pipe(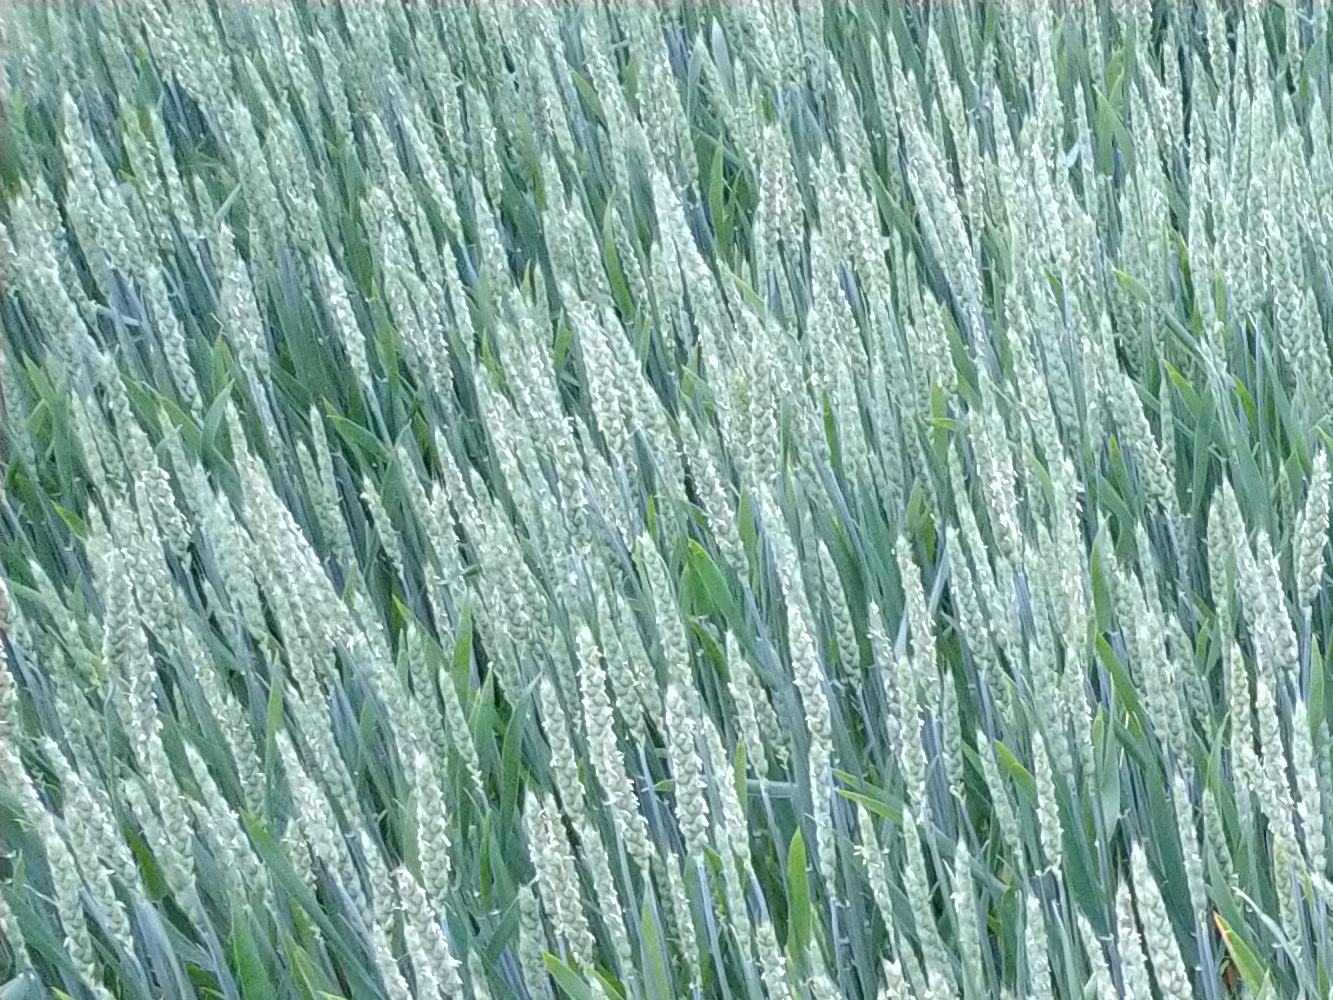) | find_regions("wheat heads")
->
[152,736,195,865]
[705,719,753,873]
[57,697,89,776]
[986,151,1002,227]
[545,791,567,858]
[885,968,925,1000]
[922,292,957,391]
[617,598,665,731]
[932,99,943,158]
[274,737,307,811]
[1075,81,1096,210]
[779,340,809,414]
[395,62,432,121]
[902,410,939,516]
[529,17,558,43]
[1229,18,1247,110]
[813,256,868,374]
[130,625,165,757]
[472,593,501,672]
[1076,916,1129,1000]
[407,628,448,775]
[412,0,449,67]
[0,727,56,830]
[287,129,314,224]
[419,208,440,277]
[418,283,454,399]
[1068,296,1083,358]
[0,355,38,477]
[287,815,318,890]
[640,535,693,684]
[924,48,934,85]
[1189,162,1207,231]
[852,102,874,180]
[8,192,33,255]
[209,59,248,155]
[970,121,978,178]
[4,95,46,178]
[112,514,181,644]
[128,194,163,265]
[368,876,399,942]
[1309,98,1333,195]
[261,386,281,463]
[980,44,996,107]
[539,214,569,304]
[1279,464,1294,542]
[17,201,55,265]
[104,369,142,475]
[51,650,76,702]
[86,398,128,489]
[430,487,465,604]
[60,143,130,269]
[896,538,941,708]
[552,50,580,114]
[1273,836,1303,950]
[1260,81,1274,161]
[614,363,638,430]
[1126,170,1138,230]
[1115,884,1162,1000]
[1003,292,1035,365]
[398,448,435,539]
[1314,0,1327,48]
[1073,209,1105,318]
[903,871,960,994]
[733,61,753,154]
[172,0,205,47]
[717,0,745,54]
[596,517,623,583]
[1194,54,1218,141]
[1026,897,1057,1000]
[175,684,186,728]
[243,0,288,95]
[609,121,630,193]
[264,500,336,665]
[361,834,396,932]
[347,27,397,134]
[44,739,82,801]
[61,93,93,179]
[992,26,1016,98]
[613,0,629,37]
[1104,0,1136,39]
[135,482,162,555]
[652,61,675,151]
[806,309,822,411]
[736,0,758,53]
[833,75,858,164]
[360,0,395,66]
[944,530,982,631]
[1187,112,1203,180]
[1126,289,1142,328]
[220,495,269,642]
[700,48,741,148]
[320,257,370,382]
[971,306,988,367]
[1208,5,1228,88]
[899,939,933,1000]
[1305,291,1333,422]
[30,43,60,88]
[316,38,352,140]
[441,671,482,779]
[471,176,509,309]
[297,442,331,543]
[256,218,276,267]
[858,806,894,939]
[1239,744,1285,836]
[432,0,462,62]
[67,24,106,115]
[639,68,663,158]
[50,37,88,118]
[584,828,634,975]
[0,73,14,98]
[1148,245,1165,349]
[520,317,566,408]
[770,323,809,406]
[285,682,315,734]
[977,731,1023,873]
[1136,525,1162,615]
[990,414,1023,571]
[1029,646,1072,776]
[1012,0,1030,76]
[551,629,584,730]
[1221,483,1259,618]
[718,830,752,955]
[115,17,145,54]
[129,423,154,475]
[269,585,326,714]
[410,222,427,275]
[668,854,701,982]
[405,121,461,234]
[954,840,982,986]
[385,265,429,378]
[63,810,133,948]
[838,365,867,483]
[184,631,230,717]
[269,132,301,214]
[232,260,267,369]
[527,494,560,590]
[143,535,177,624]
[386,0,412,43]
[1161,383,1176,475]
[1039,25,1065,125]
[596,597,647,738]
[68,281,100,326]
[1246,97,1263,174]
[1027,183,1049,244]
[353,628,382,697]
[667,436,683,489]
[218,229,246,356]
[106,550,128,694]
[1161,663,1191,768]
[226,697,268,821]
[122,122,172,239]
[581,422,623,533]
[301,723,361,824]
[957,1,975,77]
[61,0,80,20]
[1043,273,1065,343]
[476,93,501,203]
[1138,850,1200,1000]
[242,539,275,595]
[894,228,903,322]
[1248,33,1254,79]
[1064,458,1080,540]
[585,313,629,451]
[146,270,204,418]
[1207,496,1229,630]
[339,0,366,50]
[1266,218,1302,369]
[577,627,613,784]
[641,20,659,63]
[129,781,205,926]
[667,77,700,188]
[8,601,34,659]
[525,791,553,919]
[1117,379,1173,507]
[718,261,745,323]
[663,185,719,311]
[1283,91,1298,142]
[1020,418,1045,518]
[96,0,126,39]
[786,609,834,749]
[111,197,145,275]
[772,248,799,339]
[1167,619,1211,729]
[160,412,200,516]
[517,883,545,987]
[753,224,770,299]
[822,145,849,252]
[157,44,173,80]
[499,633,519,699]
[1283,0,1305,87]
[1065,649,1096,783]
[1133,0,1146,56]
[760,130,778,235]
[1263,165,1277,225]
[544,859,584,966]
[519,939,567,1000]
[397,875,466,1000]
[871,603,896,712]
[666,689,708,852]
[819,542,861,684]
[479,567,505,624]
[533,264,550,335]
[249,512,307,649]
[968,413,996,503]
[1086,1,1104,89]
[37,177,76,286]
[302,788,337,861]
[372,930,436,1000]
[1210,94,1225,162]
[98,37,134,99]
[1001,210,1028,285]
[144,469,190,551]
[1256,681,1293,802]
[388,706,414,782]
[757,924,794,1000]
[1052,177,1076,257]
[423,566,453,652]
[801,0,827,89]
[324,28,367,105]
[773,67,791,119]
[813,282,838,382]
[1152,174,1170,228]
[527,65,550,153]
[1163,42,1181,136]
[320,723,362,809]
[611,211,649,311]
[362,479,403,570]
[781,138,804,226]
[897,660,926,807]
[27,263,76,357]
[923,138,951,189]
[470,468,494,539]
[1035,86,1054,159]
[1149,614,1167,668]
[185,747,277,908]
[1143,69,1170,157]
[88,616,106,661]
[603,313,675,444]
[995,561,1022,671]
[867,310,881,372]
[1295,454,1330,604]
[479,0,503,70]
[933,215,961,302]
[847,166,890,300]
[122,134,162,230]
[1082,339,1101,451]
[475,376,529,527]
[108,684,138,757]
[495,0,532,83]
[1170,0,1190,41]
[70,203,112,294]
[927,25,956,119]
[1128,569,1151,642]
[281,214,310,294]
[69,395,105,488]
[726,633,762,767]
[1031,733,1063,864]
[29,562,103,681]
[1027,368,1064,477]
[942,673,964,794]
[236,109,285,233]
[759,489,812,629]
[434,430,482,540]
[699,305,739,374]
[1025,269,1044,308]
[1184,214,1218,356]
[119,0,143,27]
[1173,778,1207,921]
[532,41,573,151]
[725,367,754,472]
[33,0,49,37]
[335,876,375,936]
[990,107,1021,220]
[193,175,220,274]
[1254,34,1271,83]
[217,114,262,217]
[652,178,669,240]
[499,549,531,640]
[274,0,316,112]
[906,250,926,340]
[790,400,817,466]
[1049,481,1079,576]
[1246,177,1266,311]
[652,243,670,344]
[0,667,21,748]
[539,154,569,252]
[444,245,475,352]
[679,417,750,586]
[1033,141,1066,261]
[1130,82,1153,153]
[14,265,49,337]
[975,356,992,414]
[807,944,843,1000]
[1025,554,1058,674]
[314,258,344,344]
[87,500,116,555]
[405,935,460,1000]
[335,516,356,571]
[4,22,39,99]
[1293,702,1326,871]
[357,201,380,274]
[67,780,144,893]
[1141,631,1169,747]
[879,301,903,392]
[191,803,243,888]
[225,402,258,513]
[578,30,610,98]
[1033,59,1040,112]
[410,35,444,105]
[354,591,387,659]
[0,884,34,974]
[46,839,99,984]
[152,112,196,232]
[500,327,529,383]
[1245,0,1265,41]
[545,402,594,549]
[1259,539,1300,676]
[869,37,896,141]
[902,807,929,896]
[892,65,917,160]
[614,445,639,504]
[654,480,680,553]
[661,238,693,338]
[1117,195,1139,275]
[811,745,838,899]
[446,0,485,83]
[1290,136,1308,217]
[550,528,586,627]
[0,582,11,633]
[910,175,944,277]
[151,0,200,63]
[1096,516,1121,602]
[811,160,833,246]
[744,311,786,384]
[575,317,600,422]
[1022,116,1034,171]
[570,215,612,304]
[495,509,552,631]
[845,202,865,282]
[310,405,337,503]
[951,87,968,189]
[1114,575,1143,692]
[502,356,526,421]
[1158,478,1188,573]
[1145,129,1162,185]
[1228,94,1253,202]
[907,121,932,178]
[963,513,1005,629]
[1099,178,1107,243]
[370,116,416,220]
[905,327,932,436]
[967,633,1012,714]
[1076,538,1095,614]
[1037,528,1071,634]
[716,290,734,341]
[598,127,612,189]
[632,0,646,59]
[33,266,79,320]
[1106,385,1143,468]
[1202,343,1219,414]
[469,952,521,1000]
[759,0,775,41]
[1229,643,1252,765]
[777,193,799,261]
[538,679,586,827]
[217,0,245,52]
[872,363,904,498]
[1041,315,1081,444]
[910,70,920,134]
[1100,315,1126,407]
[194,466,234,600]
[995,88,1026,215]
[1307,154,1322,243]
[1203,790,1238,897]
[948,442,967,520]
[84,0,110,82]
[586,551,618,614]
[288,512,338,615]
[604,738,651,866]
[316,790,372,919]
[1105,259,1147,384]
[1010,322,1031,403]
[750,0,783,79]
[74,683,121,774]
[1224,196,1251,313]
[750,364,778,483]
[888,143,903,205]
[602,56,626,125]
[1056,138,1068,193]
[935,176,976,299]
[1163,222,1180,275]
[175,33,215,121]
[416,755,450,900]
[968,165,982,240]
[0,229,18,273]
[739,663,791,764]
[888,33,906,113]
[1210,161,1225,267]
[140,0,198,95]
[188,0,222,53]
[498,395,550,504]
[1282,165,1299,282]
[772,0,801,80]
[367,187,412,269]
[45,0,64,23]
